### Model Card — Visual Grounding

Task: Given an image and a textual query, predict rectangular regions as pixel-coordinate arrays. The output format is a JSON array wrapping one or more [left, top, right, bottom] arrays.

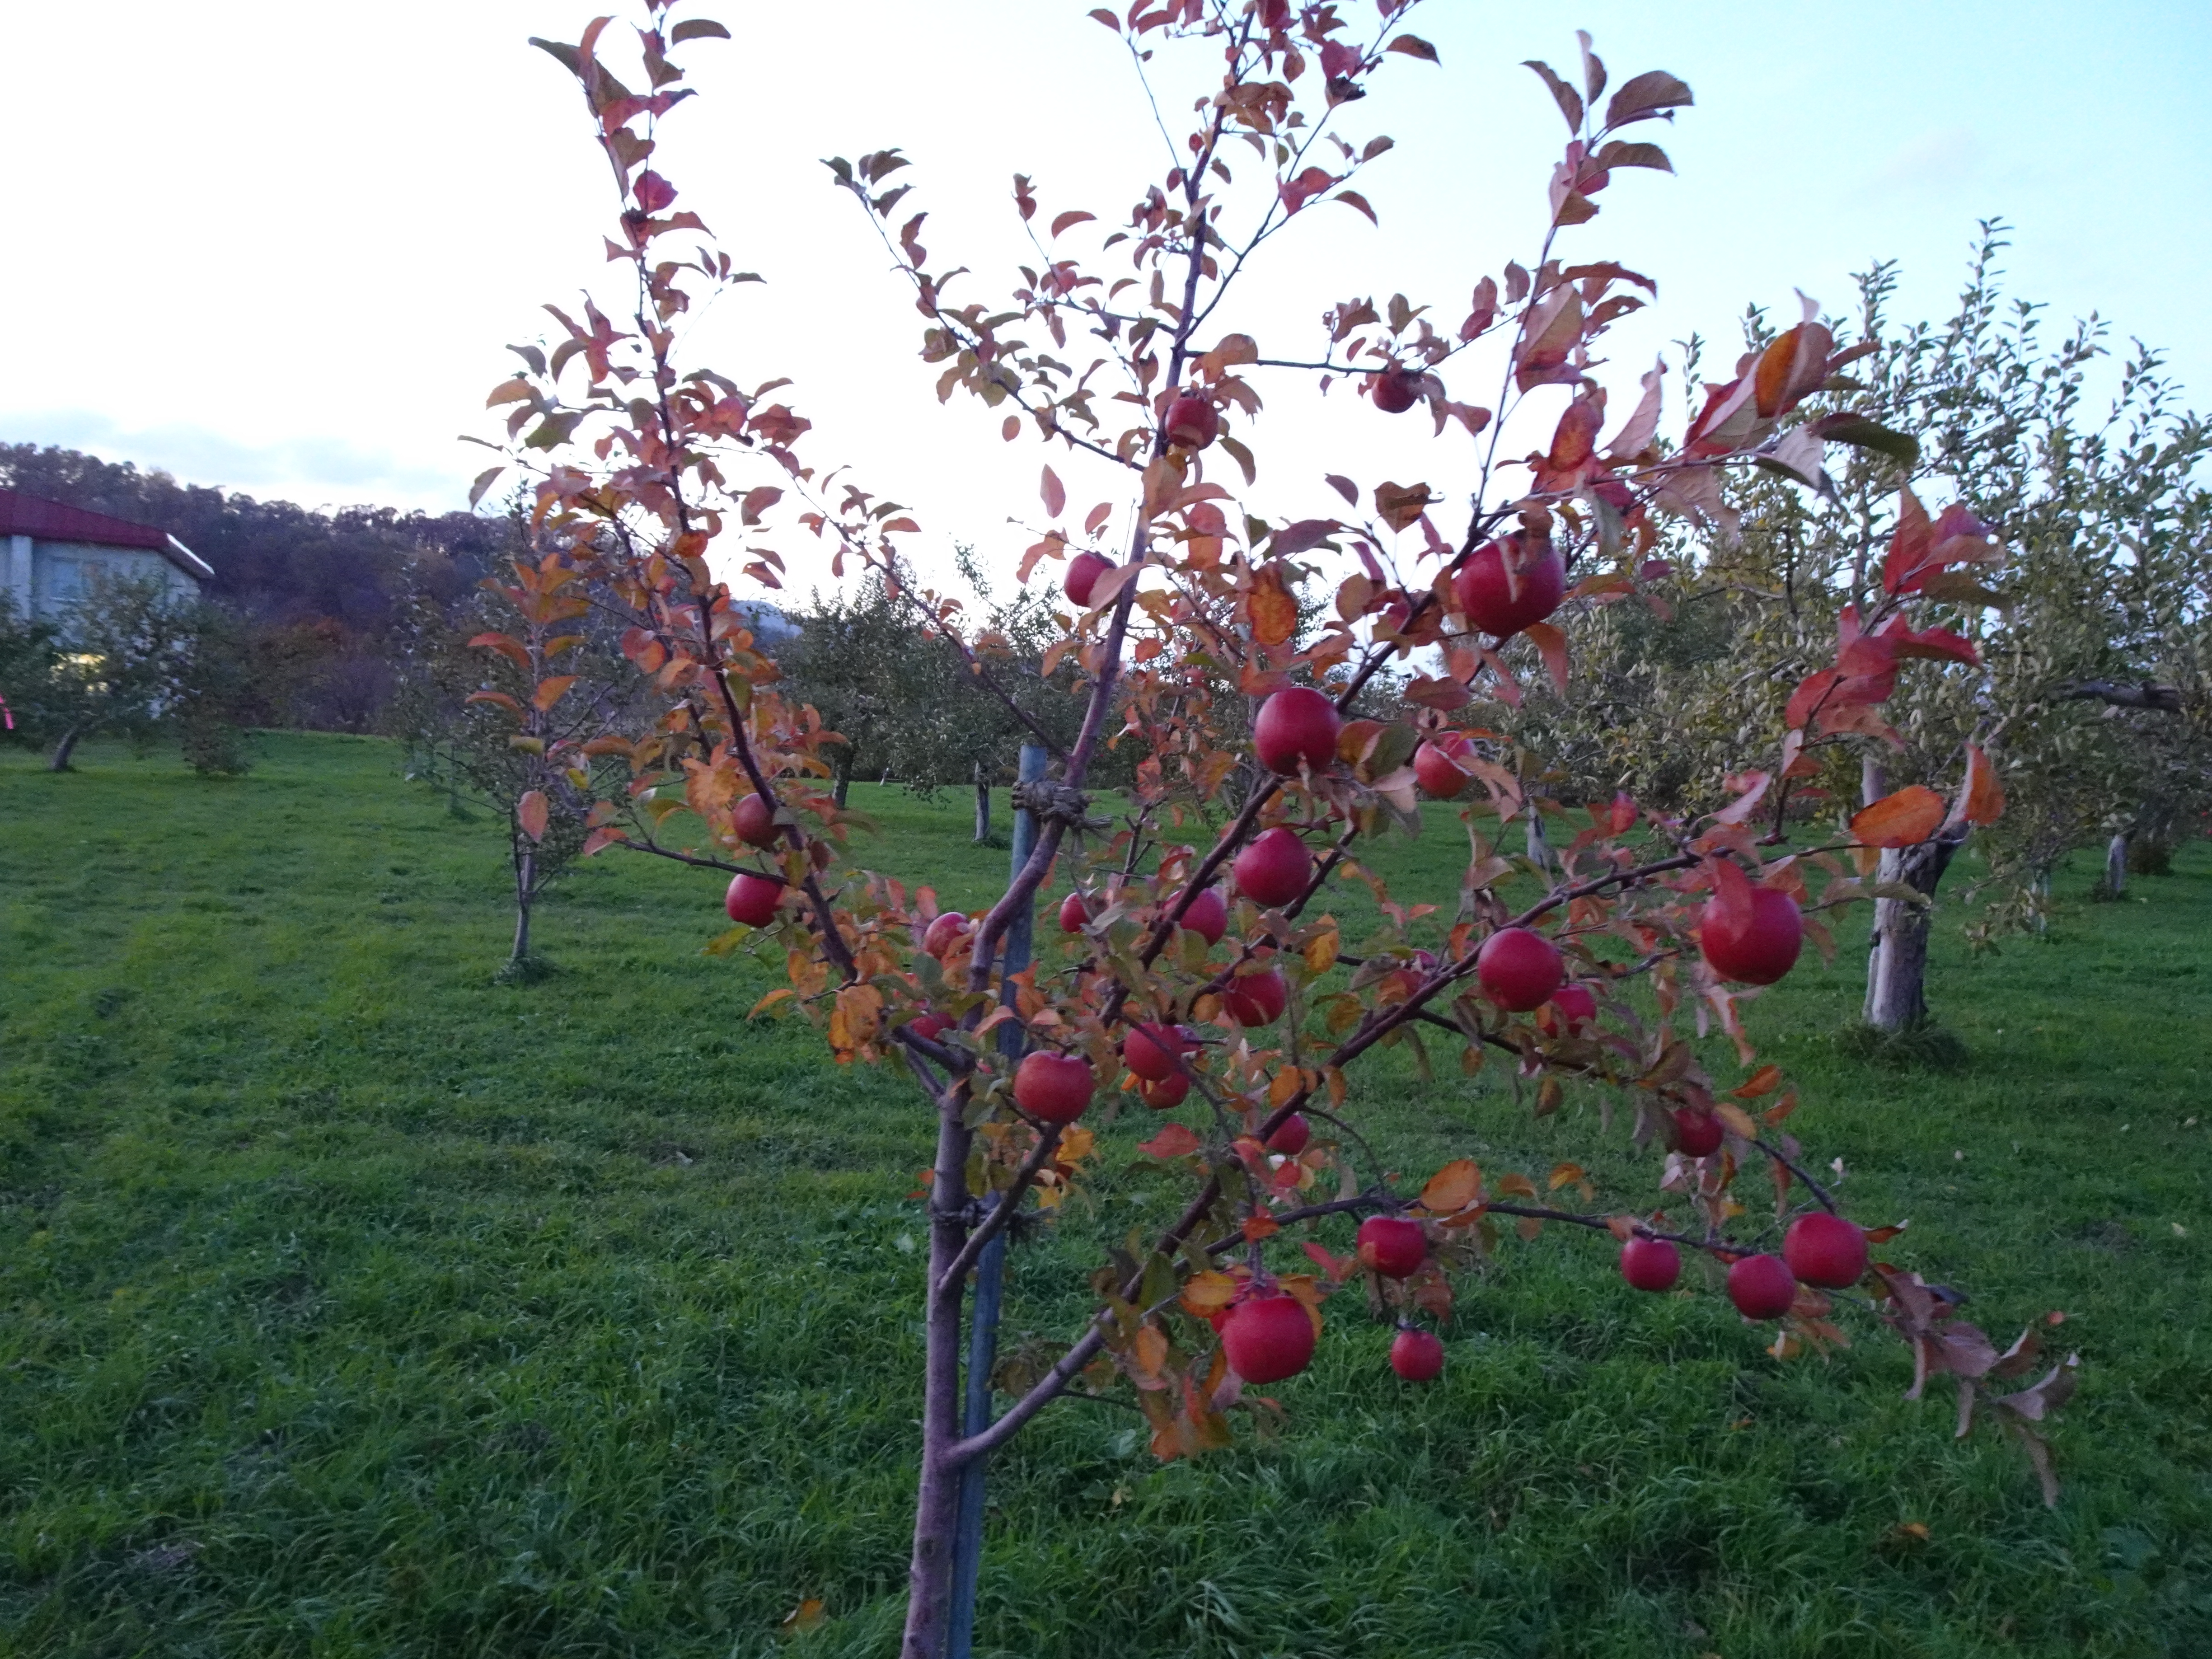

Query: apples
[[1534, 981, 1598, 1043], [1219, 966, 1288, 1028], [1378, 948, 1439, 999], [1234, 825, 1314, 907], [1160, 884, 1227, 952], [1223, 1296, 1315, 1385], [1834, 644, 1903, 704], [1163, 1026, 1207, 1064], [1012, 1129, 1076, 1189], [1138, 1059, 1193, 1112], [1253, 686, 1342, 780], [921, 910, 981, 964], [1621, 1233, 1682, 1293], [791, 728, 809, 749], [1228, 1139, 1271, 1183], [1358, 1215, 1427, 1279], [1392, 1328, 1443, 1382], [942, 964, 992, 1008], [732, 793, 785, 847], [1477, 927, 1565, 1015], [1608, 846, 1638, 872], [1059, 892, 1113, 941], [894, 970, 938, 1010], [1794, 1289, 1831, 1317], [1243, 914, 1293, 958], [1014, 1048, 1095, 1126], [1253, 789, 1293, 828], [1260, 1112, 1310, 1159], [1015, 980, 1062, 1029], [772, 837, 835, 883], [1697, 879, 1805, 987], [968, 916, 1013, 961], [1163, 396, 1220, 451], [1590, 787, 1641, 834], [841, 945, 901, 987], [975, 1058, 997, 1080], [725, 872, 787, 929], [1324, 796, 1351, 822], [902, 999, 959, 1051], [1727, 1255, 1795, 1319], [1666, 1100, 1723, 1158], [1460, 525, 1565, 641], [1648, 807, 1672, 833], [1206, 1267, 1283, 1345], [1735, 767, 1777, 807], [1348, 787, 1396, 834], [1178, 681, 1212, 711], [1783, 1211, 1867, 1292], [655, 572, 684, 601], [1721, 772, 1742, 795], [2202, 819, 2212, 839], [1064, 552, 1120, 608], [1371, 373, 1417, 414], [1398, 588, 1440, 631], [1694, 1158, 1729, 1192], [1415, 730, 1480, 799], [2198, 803, 2212, 821], [1651, 1208, 1685, 1237], [635, 168, 668, 208], [1079, 970, 1122, 1007], [1123, 1020, 1186, 1080]]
